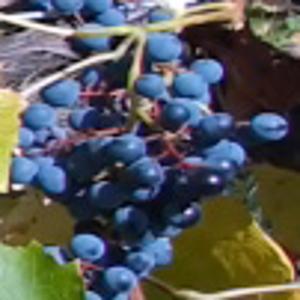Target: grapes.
<instances>
[{"label":"grapes","mask_w":300,"mask_h":300,"mask_svg":"<svg viewBox=\"0 0 300 300\" xmlns=\"http://www.w3.org/2000/svg\"><path fill=\"white\" fill-rule=\"evenodd\" d=\"M227 76L218 59L198 57L171 86L143 72L110 93L101 73L86 68L77 80L47 84L20 114L18 146L8 176L16 185L38 188L51 198L69 197L79 220L114 211L117 229L137 241L123 264L109 262L111 247L100 234L70 240L74 257L103 267L100 287L84 300H128L155 267L171 264L174 239L202 218L197 203L216 197L230 174L247 162L244 142L232 135L234 117L209 106Z\"/></svg>","instance_id":"01657485"},{"label":"grapes","mask_w":300,"mask_h":300,"mask_svg":"<svg viewBox=\"0 0 300 300\" xmlns=\"http://www.w3.org/2000/svg\"><path fill=\"white\" fill-rule=\"evenodd\" d=\"M33 5L36 9L45 11L68 14L83 12L103 27H122L128 19L127 6L113 0H33Z\"/></svg>","instance_id":"b958b902"},{"label":"grapes","mask_w":300,"mask_h":300,"mask_svg":"<svg viewBox=\"0 0 300 300\" xmlns=\"http://www.w3.org/2000/svg\"><path fill=\"white\" fill-rule=\"evenodd\" d=\"M247 133L259 141L284 143L292 134V126L279 112L256 113L247 123Z\"/></svg>","instance_id":"0513c4c2"},{"label":"grapes","mask_w":300,"mask_h":300,"mask_svg":"<svg viewBox=\"0 0 300 300\" xmlns=\"http://www.w3.org/2000/svg\"><path fill=\"white\" fill-rule=\"evenodd\" d=\"M145 57L156 63L175 62L184 53V43L171 30L156 31L146 35Z\"/></svg>","instance_id":"84f90ec7"},{"label":"grapes","mask_w":300,"mask_h":300,"mask_svg":"<svg viewBox=\"0 0 300 300\" xmlns=\"http://www.w3.org/2000/svg\"><path fill=\"white\" fill-rule=\"evenodd\" d=\"M75 49L81 54H94L106 52L114 47V40L109 38L101 39H78L74 38Z\"/></svg>","instance_id":"f8a65327"},{"label":"grapes","mask_w":300,"mask_h":300,"mask_svg":"<svg viewBox=\"0 0 300 300\" xmlns=\"http://www.w3.org/2000/svg\"><path fill=\"white\" fill-rule=\"evenodd\" d=\"M44 250L51 254L61 265L70 264V255L62 245L48 244L44 246Z\"/></svg>","instance_id":"5460f4e3"},{"label":"grapes","mask_w":300,"mask_h":300,"mask_svg":"<svg viewBox=\"0 0 300 300\" xmlns=\"http://www.w3.org/2000/svg\"><path fill=\"white\" fill-rule=\"evenodd\" d=\"M172 19L171 15H161V14H157V13H151L148 16L147 22L149 24H153V23H157V22H161V21H169Z\"/></svg>","instance_id":"83cd7487"}]
</instances>
